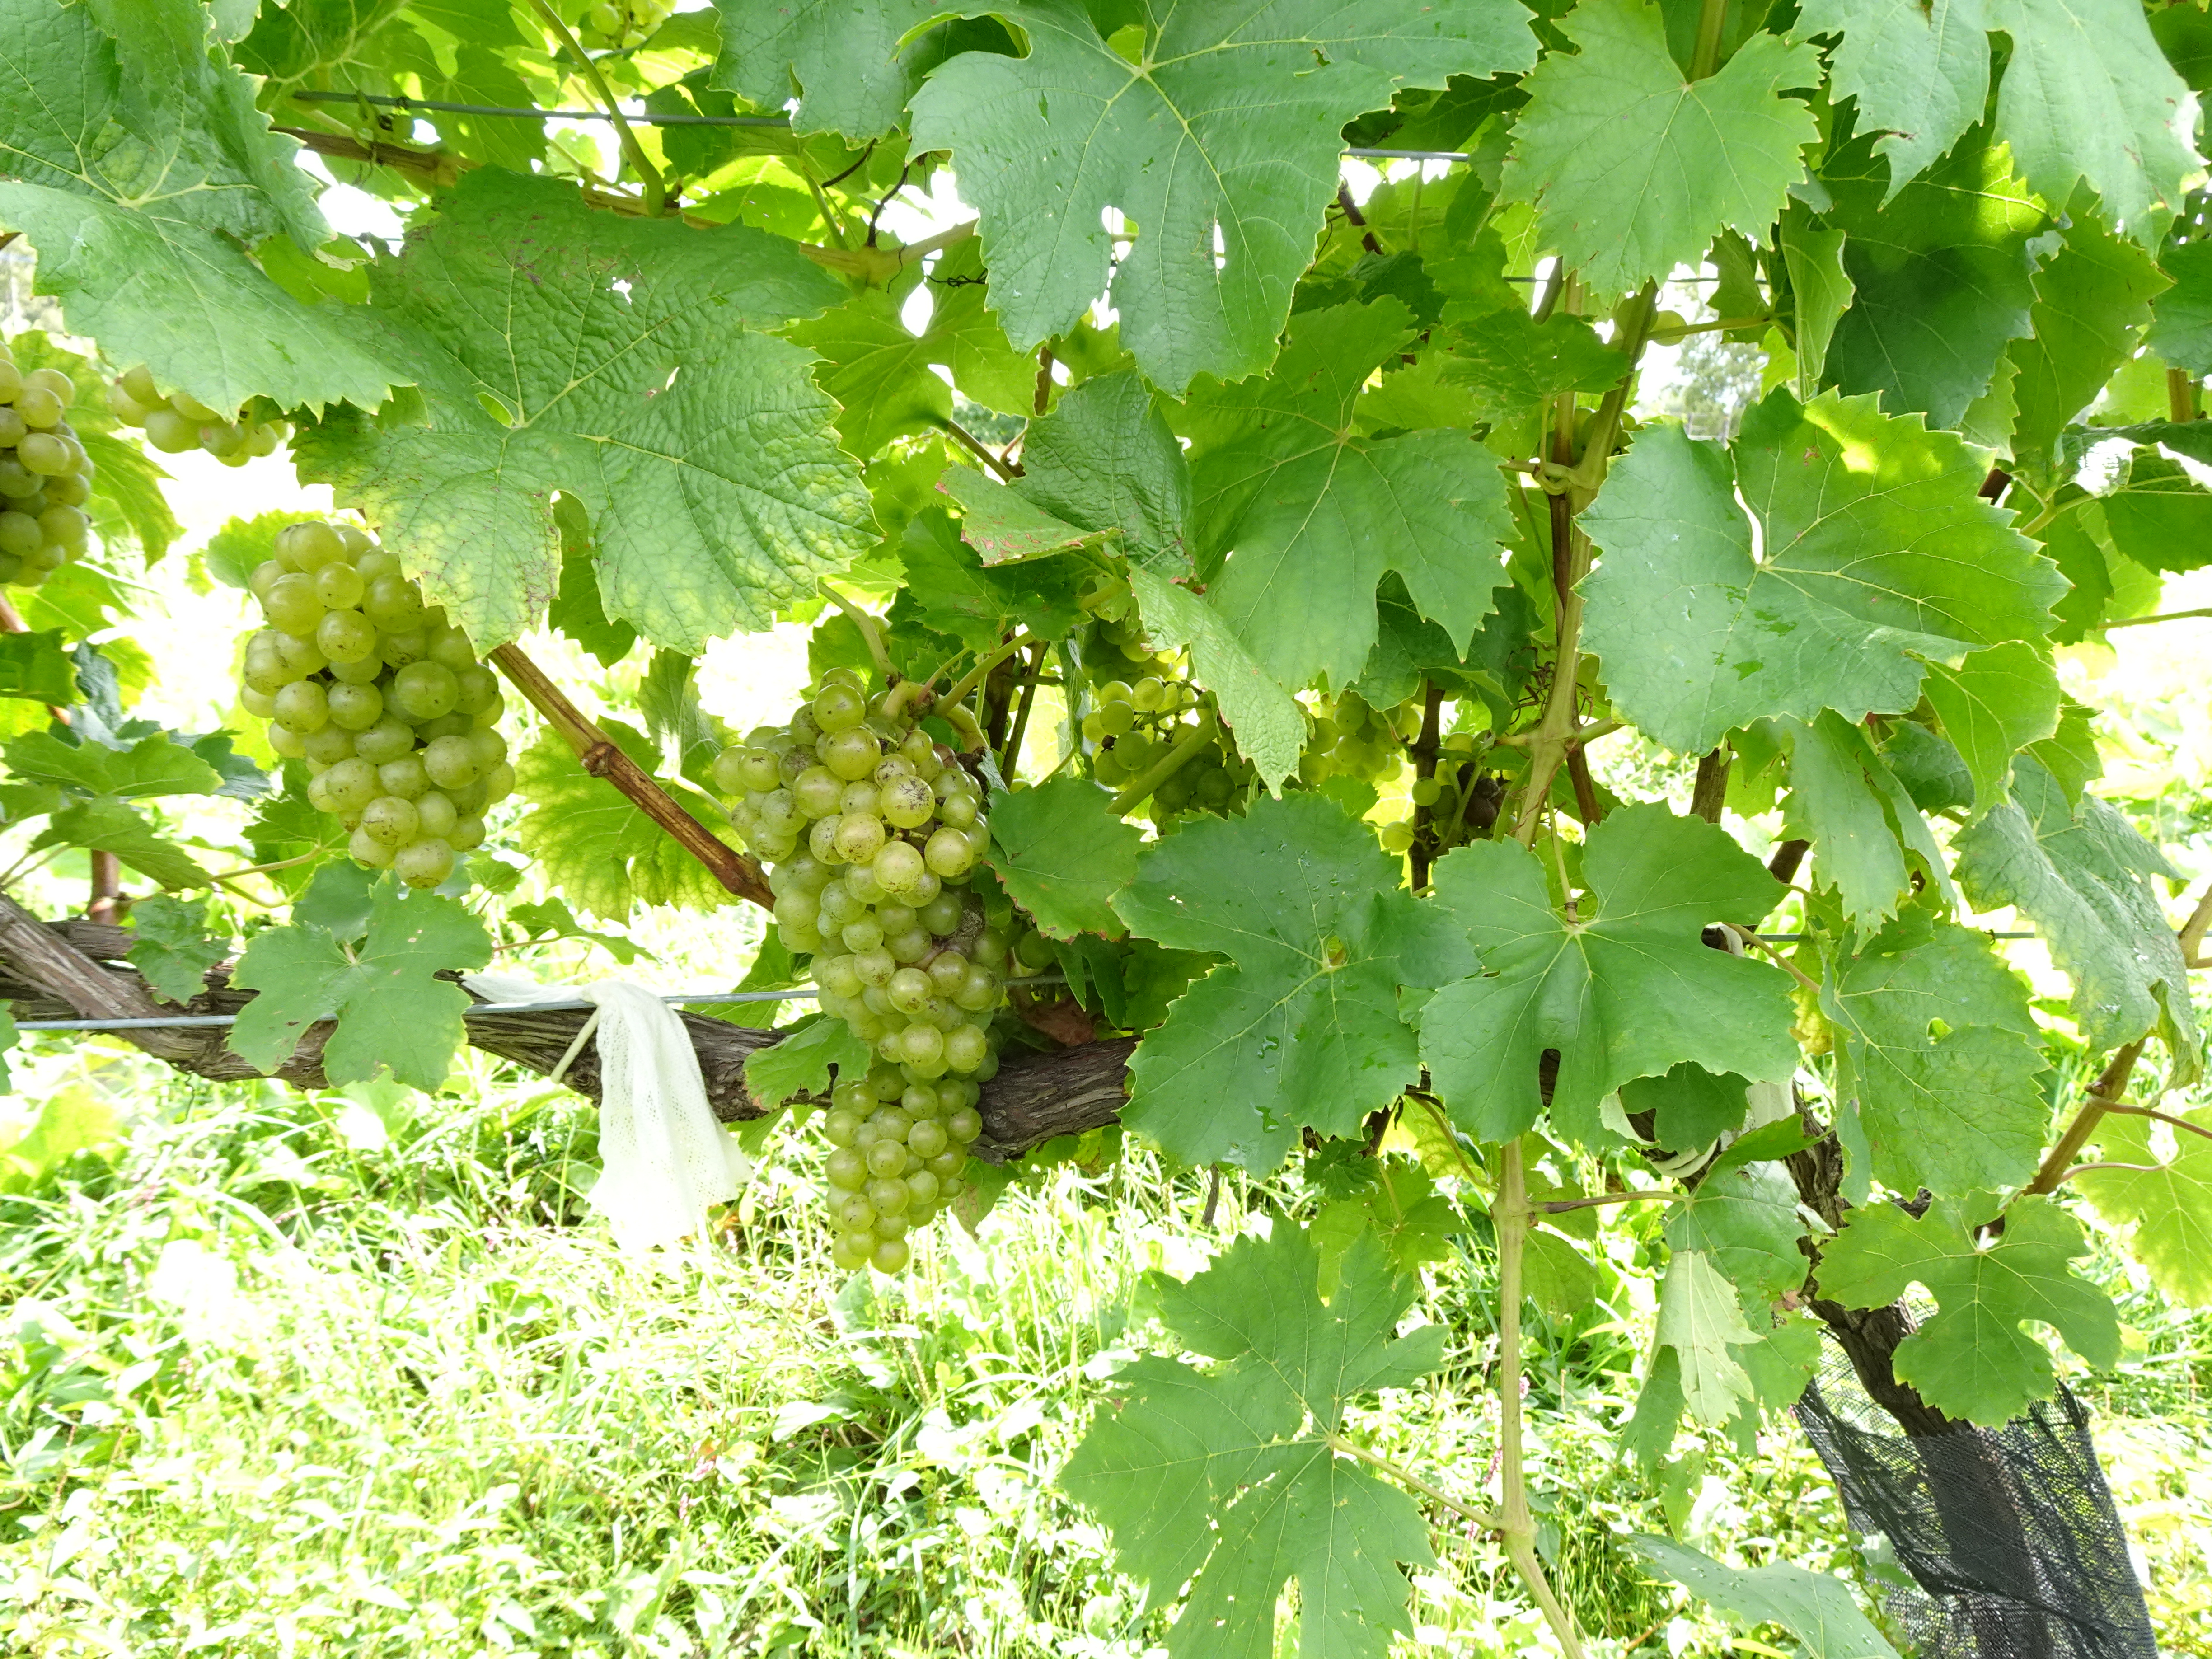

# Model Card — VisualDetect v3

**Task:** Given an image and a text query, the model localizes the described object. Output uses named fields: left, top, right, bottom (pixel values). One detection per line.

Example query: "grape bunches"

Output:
left=110, top=362, right=287, bottom=467
left=984, top=906, right=1089, bottom=970
left=0, top=341, right=95, bottom=586
left=825, top=1027, right=1007, bottom=1273
left=1381, top=732, right=1551, bottom=852
left=1148, top=691, right=1340, bottom=840
left=1081, top=609, right=1182, bottom=689
left=1320, top=689, right=1423, bottom=788
left=241, top=522, right=513, bottom=888
left=1081, top=677, right=1195, bottom=788
left=713, top=666, right=1012, bottom=1079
